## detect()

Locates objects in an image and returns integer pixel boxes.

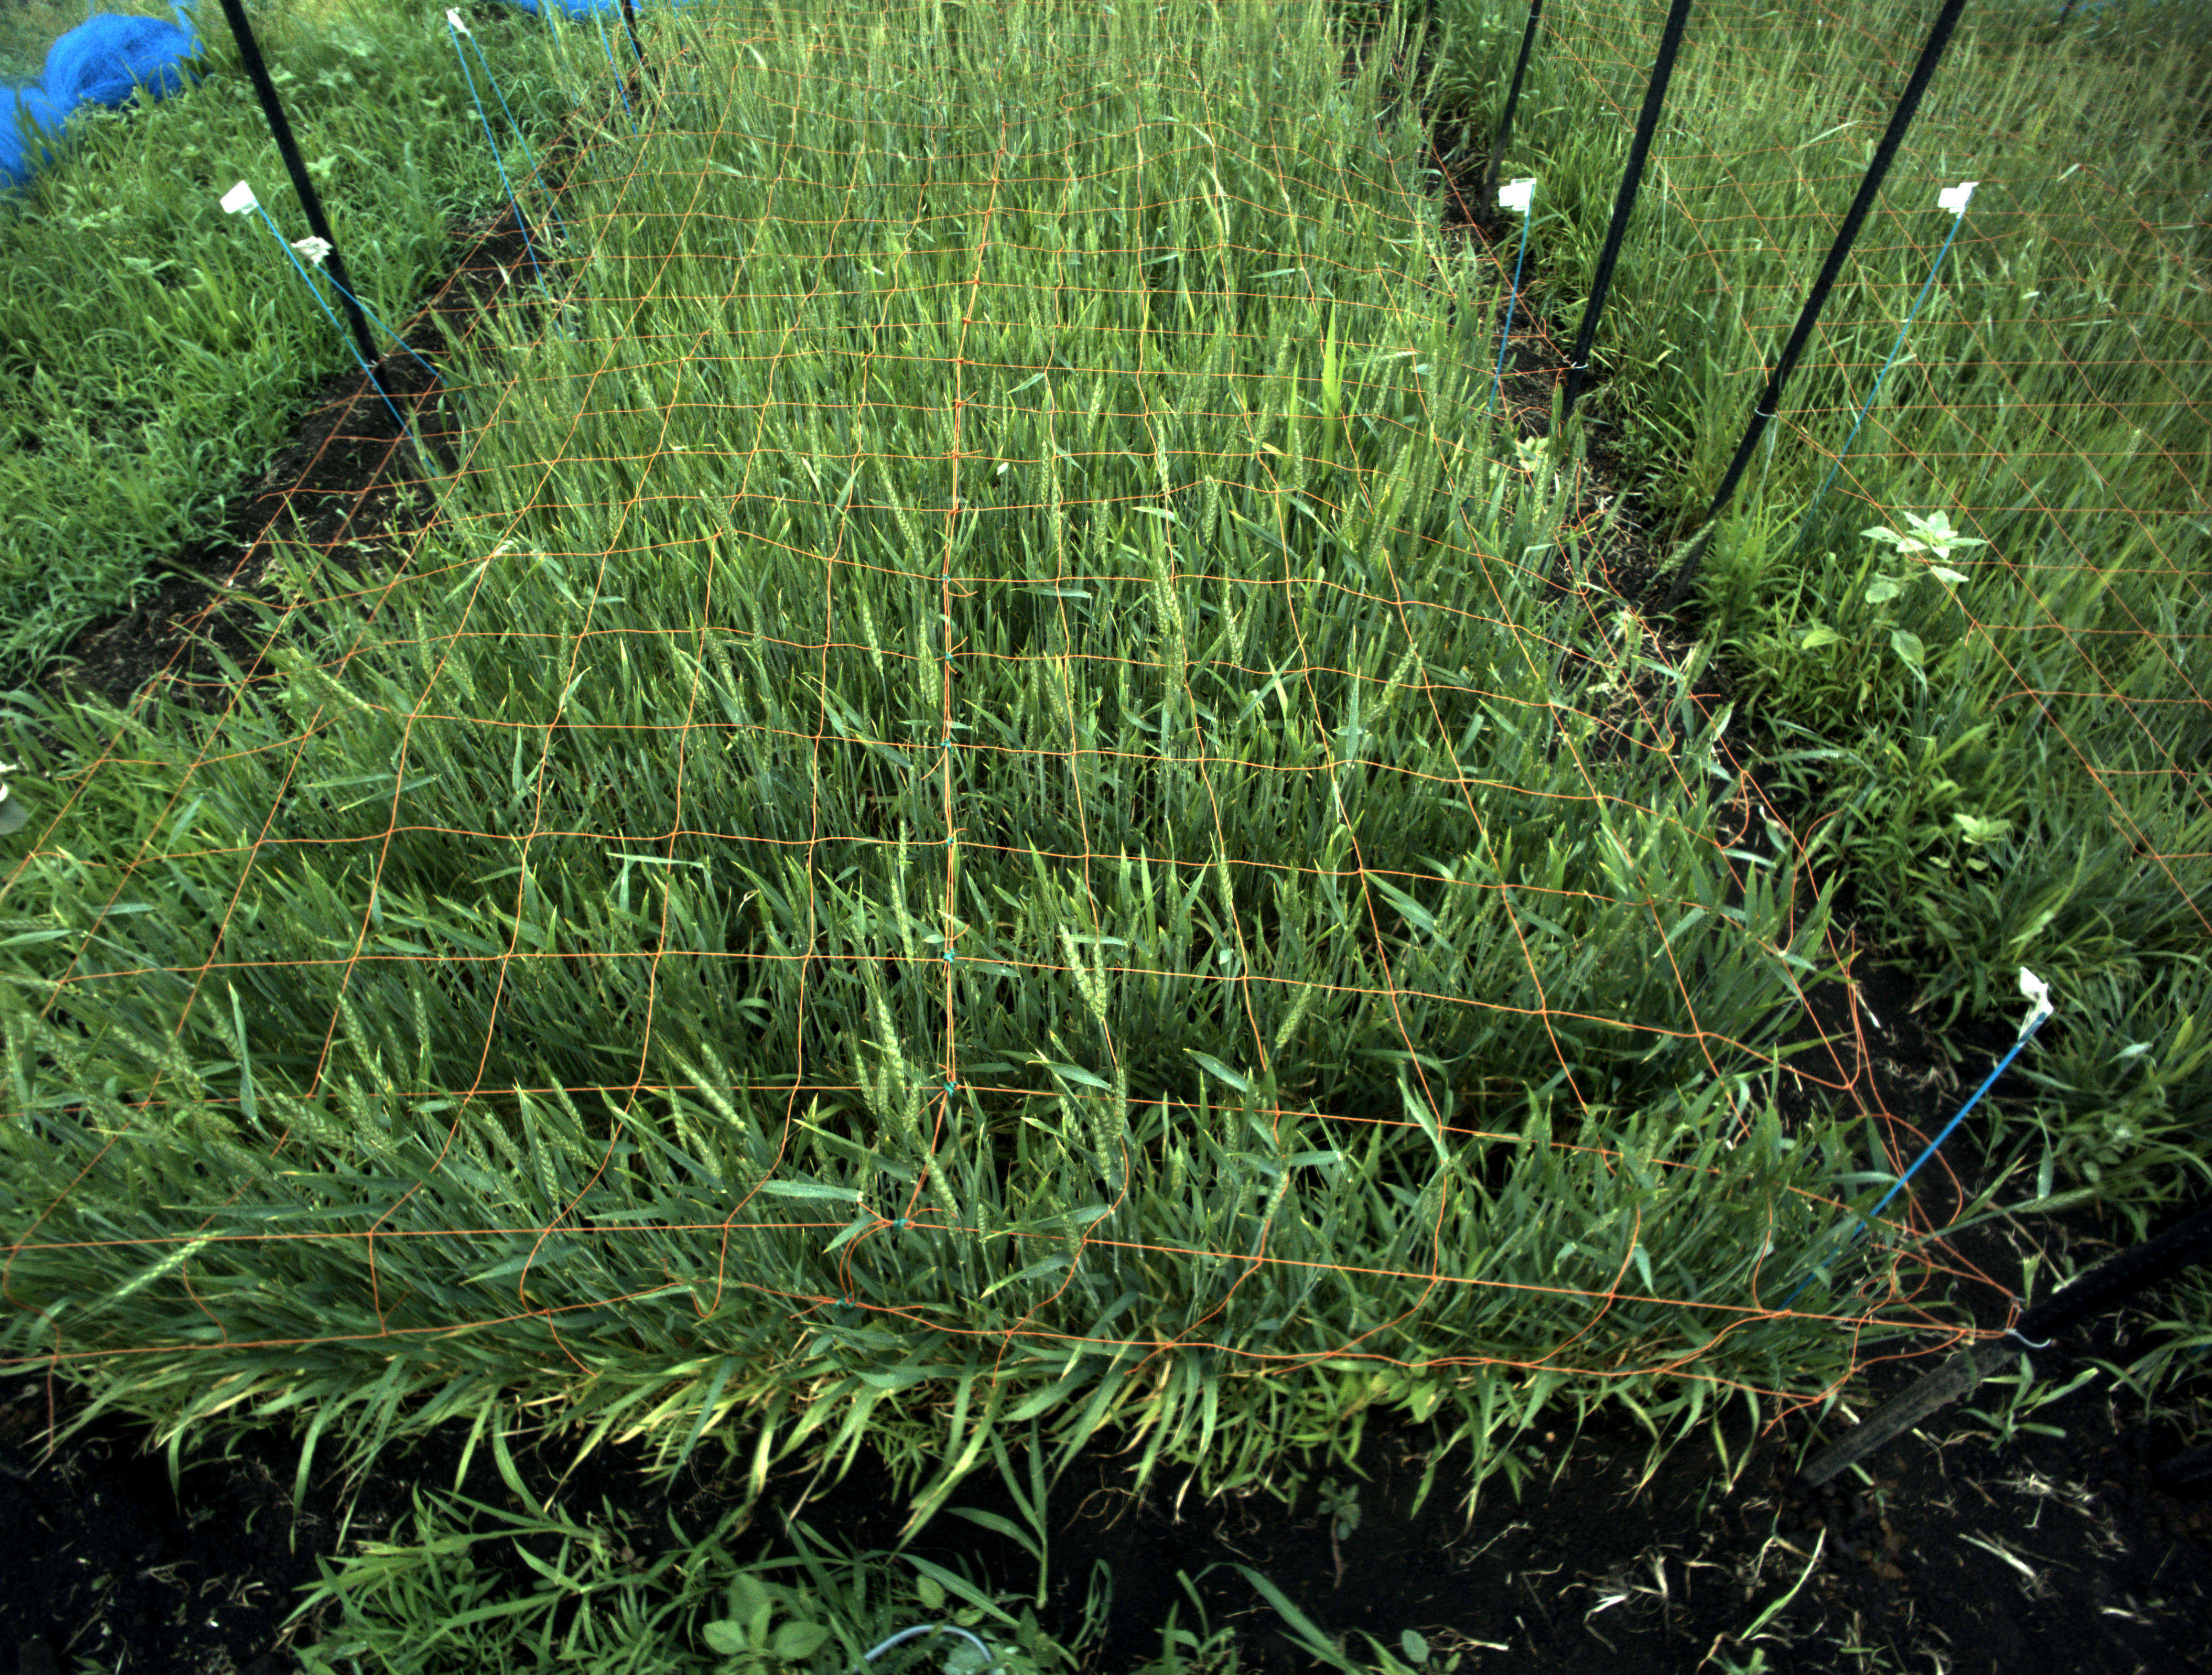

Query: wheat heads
[965,1,971,33]
[677,555,689,592]
[485,1111,518,1164]
[111,1023,204,1087]
[1654,874,1680,909]
[1324,61,1332,79]
[1015,694,1024,730]
[414,879,429,918]
[679,1060,748,1134]
[913,520,926,574]
[1476,873,1503,921]
[1378,18,1387,50]
[1040,874,1052,911]
[1679,68,1692,106]
[1435,891,1450,932]
[610,914,639,952]
[1471,327,1488,369]
[789,535,805,570]
[1223,1110,1240,1162]
[1260,1094,1270,1129]
[1088,228,1095,255]
[440,642,477,694]
[1111,53,1123,94]
[1261,345,1272,379]
[204,715,225,760]
[345,1071,381,1158]
[499,457,524,505]
[408,405,426,459]
[1552,1194,1562,1223]
[918,16,927,52]
[544,47,562,82]
[1173,125,1182,167]
[855,169,868,219]
[884,351,893,388]
[509,582,524,613]
[1422,753,1438,782]
[1143,181,1150,211]
[1117,914,1125,939]
[900,188,910,214]
[337,988,371,1067]
[742,484,749,504]
[680,532,689,557]
[660,20,669,57]
[861,695,872,734]
[1035,903,1048,944]
[1173,934,1183,966]
[1527,717,1542,748]
[551,386,572,430]
[1157,555,1182,628]
[1449,574,1458,596]
[659,901,674,936]
[1312,223,1327,264]
[939,25,948,58]
[524,370,546,417]
[1341,906,1363,939]
[1341,886,1348,911]
[1109,1067,1127,1144]
[1367,513,1390,567]
[1031,1144,1045,1169]
[1293,428,1303,495]
[1185,25,1195,65]
[651,679,661,707]
[1099,596,1108,632]
[925,887,936,923]
[1170,893,1179,936]
[274,1089,356,1150]
[658,67,666,91]
[520,973,540,1002]
[1266,291,1277,340]
[1299,10,1309,38]
[1383,443,1408,494]
[570,440,580,468]
[1825,1149,1853,1176]
[667,592,689,628]
[762,267,769,294]
[1250,401,1268,460]
[689,1132,723,1179]
[822,1165,832,1208]
[1097,1103,1117,1145]
[1223,205,1232,239]
[967,468,975,503]
[840,447,852,473]
[227,922,252,953]
[1228,313,1236,332]
[1056,1093,1087,1150]
[668,1084,689,1150]
[956,1141,969,1174]
[590,523,602,557]
[483,569,507,602]
[686,15,709,54]
[1313,3,1325,39]
[910,566,919,598]
[1393,2,1400,41]
[779,35,790,68]
[928,659,940,701]
[484,894,499,931]
[727,373,736,400]
[1218,850,1234,915]
[1445,1150,1465,1171]
[1483,365,1493,399]
[1014,789,1020,818]
[1134,299,1142,325]
[645,1140,668,1171]
[920,336,930,382]
[713,753,727,782]
[1012,1198,1021,1221]
[654,33,664,56]
[1140,360,1150,395]
[913,735,922,783]
[1199,1165,1212,1188]
[1436,365,1455,427]
[704,151,715,184]
[820,160,837,196]
[1778,47,1791,78]
[668,30,678,63]
[254,768,278,793]
[560,44,585,93]
[1339,490,1356,539]
[1249,320,1265,353]
[560,557,573,591]
[1427,614,1441,649]
[270,1108,353,1152]
[1352,498,1360,551]
[535,1135,561,1204]
[931,1,941,33]
[793,16,810,72]
[1125,956,1133,985]
[874,911,886,946]
[2111,207,2129,236]
[469,544,510,583]
[850,922,867,956]
[1474,442,1485,518]
[709,482,739,543]
[1455,916,1466,942]
[968,67,983,105]
[667,638,707,697]
[683,272,690,293]
[1180,152,1189,186]
[2077,67,2097,106]
[386,702,418,744]
[755,330,764,362]
[1041,300,1055,338]
[807,580,814,608]
[1399,18,1407,54]
[1630,95,1639,113]
[523,464,531,492]
[1149,942,1161,963]
[557,618,572,683]
[288,660,349,722]
[777,543,795,584]
[1691,76,1707,108]
[623,572,631,604]
[1424,62,1439,98]
[1299,41,1308,89]
[1450,874,1466,912]
[544,310,558,378]
[582,549,590,566]
[758,60,770,84]
[673,482,681,503]
[433,493,479,557]
[1292,38,1298,64]
[397,792,419,820]
[1263,1169,1291,1221]
[2092,692,2109,720]
[616,56,630,88]
[693,720,706,753]
[776,67,783,88]
[1203,473,1213,532]
[2,1021,18,1103]
[1283,113,1296,168]
[888,194,901,223]
[785,74,790,90]
[1116,474,1125,505]
[1288,610,1294,630]
[459,650,473,682]
[1404,515,1421,570]
[832,1198,846,1214]
[1752,1209,1768,1247]
[840,709,851,749]
[567,464,580,490]
[1410,602,1419,633]
[921,1146,958,1213]
[1897,293,1908,317]
[623,250,630,282]
[1431,1185,1444,1215]
[84,690,194,782]
[1171,1160,1183,1193]
[1824,39,1836,67]
[603,151,616,184]
[1020,347,1029,378]
[444,695,480,740]
[1660,896,1682,933]
[1638,1124,1658,1174]
[1180,312,1186,340]
[943,279,948,304]
[314,666,377,715]
[1007,336,1020,370]
[1412,655,1424,693]
[1597,486,1628,539]
[1154,578,1169,638]
[830,884,840,924]
[867,34,878,79]
[809,1131,829,1165]
[1794,816,1834,870]
[720,55,731,86]
[1012,9,1023,52]
[1026,935,1032,963]
[1239,1176,1254,1209]
[1024,62,1035,112]
[890,581,901,608]
[885,50,895,85]
[637,34,654,55]
[492,455,513,519]
[1126,345,1135,374]
[1372,355,1393,423]
[2122,428,2143,457]
[47,1181,90,1212]
[530,409,547,445]
[726,1227,749,1243]
[1086,376,1102,438]
[952,302,960,339]
[1197,354,1213,416]
[576,603,587,628]
[705,71,713,111]
[650,77,673,117]
[1032,722,1040,750]
[749,608,763,655]
[1102,328,1111,369]
[632,1110,649,1156]
[596,244,608,278]
[1707,701,1734,737]
[1392,459,1416,525]
[1047,85,1056,129]
[1420,710,1433,740]
[1388,423,1394,444]
[883,1107,907,1145]
[748,1157,773,1179]
[398,653,415,702]
[1092,501,1107,567]
[1632,918,1649,950]
[636,1243,655,1260]
[1381,642,1418,701]
[664,496,671,519]
[1788,39,1804,73]
[1576,543,1598,584]
[1273,979,1312,1049]
[1153,181,1166,210]
[570,759,581,792]
[782,702,790,748]
[796,492,804,520]
[1125,132,1131,167]
[963,271,973,308]
[1062,1212,1083,1258]
[1127,773,1133,798]
[814,342,827,365]
[555,505,564,523]
[1425,103,1441,131]
[972,31,980,64]
[1271,332,1291,388]
[1253,500,1269,558]
[827,304,836,373]
[967,572,974,603]
[933,449,941,480]
[1303,323,1314,363]
[1440,914,1462,936]
[1293,118,1300,152]
[682,719,696,750]
[1401,43,1412,75]
[747,340,757,368]
[1414,481,1431,518]
[1156,418,1170,494]
[1342,685,1355,725]
[763,724,773,772]
[1962,32,1975,67]
[1094,24,1099,55]
[938,892,951,936]
[928,480,933,519]
[551,1073,584,1127]
[1704,1215,1723,1234]
[1092,1112,1111,1183]
[1001,387,1008,432]
[853,1048,878,1113]
[556,925,576,954]
[820,117,827,137]
[1224,257,1230,285]
[938,406,963,471]
[1060,50,1066,78]
[1176,375,1193,432]
[914,65,919,96]
[1093,496,1110,554]
[1698,83,1709,118]
[1231,604,1252,665]
[861,1169,870,1207]
[601,46,613,87]
[657,338,683,363]
[746,567,755,594]
[79,899,115,933]
[1298,398,1310,441]
[1557,905,1572,928]
[1477,588,1490,610]
[700,1040,735,1106]
[1267,756,1275,787]
[971,682,985,730]
[927,76,937,111]
[876,461,916,546]
[1267,386,1282,435]
[622,727,641,761]
[1372,476,1383,510]
[976,1200,988,1239]
[82,1190,139,1216]
[1045,0,1051,47]
[996,425,1003,450]
[1336,1172,1347,1192]
[1292,275,1300,298]
[584,734,603,770]
[1416,264,1423,291]
[1457,450,1480,505]
[1194,461,1203,494]
[900,270,905,289]
[858,459,866,497]
[1092,943,1108,1022]
[361,1056,389,1091]
[1669,77,1681,119]
[1503,543,1521,584]
[695,261,711,301]
[1068,724,1084,757]
[1419,455,1432,505]
[1119,289,1128,317]
[902,1079,921,1133]
[1926,87,1943,114]
[1433,736,1443,752]
[1774,1149,1794,1181]
[2084,299,2099,331]
[1096,291,1102,316]
[268,912,291,947]
[901,75,909,120]
[1031,328,1046,371]
[992,330,998,357]
[470,292,509,350]
[690,279,699,300]
[796,300,825,341]
[1704,108,1720,134]
[414,609,436,676]
[681,295,695,316]
[885,69,888,89]
[1369,317,1394,383]
[1588,1211,1616,1235]
[579,40,602,74]
[1054,23,1063,59]
[1301,905,1309,942]
[1425,545,1446,587]
[834,228,841,257]
[105,1097,183,1144]
[1320,238,1327,269]
[1164,883,1172,918]
[1365,701,1389,724]
[684,869,694,912]
[984,75,994,126]
[1131,24,1141,57]
[1065,227,1073,257]
[19,1010,76,1075]
[1091,153,1097,174]
[762,84,775,120]
[986,368,997,425]
[802,117,813,156]
[1337,50,1345,68]
[639,70,655,105]
[293,919,318,943]
[1363,984,1375,1006]
[1700,898,1720,936]
[304,740,321,772]
[1245,574,1260,613]
[1336,16,1345,52]
[804,1277,819,1289]
[583,898,603,938]
[411,988,431,1048]
[591,485,607,546]
[678,57,689,92]
[1054,532,1073,581]
[1371,47,1377,85]
[825,329,838,344]
[968,940,976,974]
[598,130,627,154]
[865,743,878,766]
[601,316,613,354]
[426,723,444,757]
[1245,244,1251,267]
[1725,1150,1753,1188]
[674,453,688,478]
[1102,908,1113,935]
[993,189,1004,208]
[1221,37,1229,69]
[664,559,674,588]
[1089,18,1095,57]
[1609,641,1631,691]
[1205,53,1223,95]
[1178,183,1186,217]
[548,423,564,456]
[631,370,664,423]
[932,592,941,628]
[776,420,808,482]
[747,463,757,482]
[1420,1190,1434,1214]
[944,344,950,374]
[956,30,964,62]
[1526,933,1546,968]
[487,455,496,478]
[1526,1171,1545,1203]
[1418,231,1423,268]
[1206,254,1215,277]
[917,426,925,458]
[930,544,938,576]
[874,149,886,180]
[1457,939,1469,965]
[1307,2,1315,26]
[1001,734,1022,768]
[870,1177,882,1213]
[1530,451,1550,526]
[899,465,910,498]
[607,482,618,536]
[1077,329,1086,368]
[711,294,722,351]
[498,737,514,772]
[1266,50,1274,91]
[0,913,54,933]
[851,76,856,97]
[828,592,836,625]
[1189,123,1212,147]
[807,0,813,21]
[1205,486,1219,545]
[1704,1172,1727,1210]
[1112,564,1125,602]
[766,326,777,361]
[1250,109,1260,137]
[524,424,540,456]
[162,1028,203,1098]
[1367,240,1377,271]
[762,462,779,499]
[384,1022,414,1093]
[1181,3,1188,37]
[806,77,813,102]
[940,67,951,110]
[1189,728,1200,758]
[1796,165,1802,199]
[555,20,569,53]
[202,995,243,1062]
[719,660,745,709]
[841,378,847,407]
[731,88,752,118]
[597,411,610,447]
[1221,596,1243,664]
[1145,52,1150,74]
[833,1167,845,1188]
[1681,640,1710,703]
[877,995,908,1093]
[707,408,714,433]
[1519,890,1533,927]
[718,196,734,228]
[542,1124,601,1168]
[1501,1229,1523,1257]
[191,1183,229,1207]
[1397,741,1413,768]
[1928,283,1940,319]
[1147,11,1154,43]
[656,729,666,754]
[1166,377,1176,406]
[842,229,852,254]
[737,1167,757,1206]
[1064,656,1075,696]
[496,940,512,976]
[1276,1226,1287,1250]
[1383,14,1392,64]
[1466,580,1477,605]
[983,1136,993,1172]
[1748,913,1777,942]
[0,976,80,995]
[1734,228,1746,292]
[839,16,851,57]
[1026,1234,1047,1259]
[320,909,346,940]
[1044,672,1066,726]
[1107,475,1115,503]
[1565,588,1577,630]
[684,33,712,72]
[1637,807,1671,861]
[1182,80,1188,120]
[663,56,672,81]
[1080,772,1088,802]
[1301,454,1314,488]
[1018,67,1026,99]
[795,755,806,782]
[1223,738,1234,778]
[2123,212,2142,240]
[1763,920,1782,948]
[1519,1112,1536,1157]
[751,1226,769,1251]
[601,888,629,925]
[774,16,790,51]
[1090,291,1099,338]
[1532,519,1556,573]
[778,557,790,590]
[708,1275,744,1289]
[1578,1104,1596,1144]
[510,1142,534,1171]
[1062,2,1071,49]
[805,356,819,394]
[1058,921,1095,1007]
[526,507,540,523]
[142,894,179,926]
[572,124,585,152]
[1282,868,1298,923]
[1050,471,1061,532]
[970,363,984,399]
[839,589,848,621]
[1028,469,1034,493]
[1132,1134,1142,1176]
[1363,67,1371,111]
[625,542,639,574]
[1603,910,1635,952]
[864,115,872,144]
[1221,415,1238,467]
[797,185,809,226]
[1336,151,1340,172]
[1566,429,1580,481]
[1012,292,1019,312]
[417,908,444,955]
[1069,1,1076,36]
[792,917,817,954]
[116,1228,226,1300]
[699,488,721,520]
[1411,43,1419,81]
[1526,680,1539,710]
[1628,1217,1640,1248]
[1039,438,1051,505]
[1725,760,1753,800]
[1423,132,1434,167]
[1538,882,1551,916]
[890,876,903,928]
[1247,205,1257,230]
[1236,736,1243,770]
[565,73,575,105]
[700,623,732,666]
[1829,65,1840,95]
[1025,272,1045,334]
[914,915,926,959]
[501,1170,520,1199]
[208,1137,272,1182]
[1402,291,1412,349]
[1338,128,1343,158]
[1204,18,1217,86]
[992,909,998,934]
[1378,796,1392,821]
[2017,1186,2095,1214]
[1226,710,1238,728]
[1045,1193,1063,1216]
[815,1,825,34]
[650,168,669,203]
[1223,341,1232,375]
[85,1090,111,1133]
[1758,74,1774,111]
[759,89,765,118]
[934,188,945,217]
[1073,875,1082,907]
[1014,915,1023,946]
[990,7,1000,58]
[1919,87,1928,109]
[1261,757,1269,782]
[918,614,928,692]
[809,412,822,480]
[579,518,587,549]
[356,617,397,673]
[423,787,442,814]
[1618,818,1631,842]
[1404,58,1411,84]
[803,707,809,734]
[1165,674,1175,715]
[1028,656,1040,696]
[872,1063,891,1114]
[973,1,991,46]
[559,1189,588,1213]
[1367,508,1382,556]
[811,763,824,788]
[560,358,573,417]
[1192,394,1202,451]
[640,76,650,111]
[1173,0,1182,28]
[1401,809,1410,837]
[306,940,340,973]
[599,953,627,982]
[1000,268,1011,296]
[1126,911,1138,948]
[438,706,468,753]
[1223,1169,1233,1200]
[780,869,801,920]
[2104,275,2119,299]
[681,671,708,711]
[495,293,519,345]
[861,603,884,673]
[1214,337,1222,385]
[1173,630,1184,690]
[900,911,915,966]
[347,1105,397,1150]
[753,438,766,478]
[943,1204,955,1239]
[1312,876,1322,918]
[182,1102,237,1130]
[984,573,991,601]
[854,70,862,107]
[674,1227,693,1253]
[741,741,758,773]
[1189,146,1201,182]
[857,272,871,330]
[1282,4,1290,42]
[1195,319,1204,357]
[1034,1,1040,20]
[1086,46,1091,76]
[1400,101,1406,123]
[824,512,838,554]
[877,44,884,89]
[1306,58,1318,91]
[716,576,725,613]
[1659,519,1716,576]
[1423,454,1441,518]
[456,1115,493,1170]
[1049,711,1065,750]
[587,72,606,113]
[1425,348,1439,420]
[898,819,908,866]
[659,134,670,162]
[754,73,761,105]
[1379,52,1393,89]
[1023,711,1034,751]
[891,1149,931,1176]
[641,586,652,614]
[1339,1179,1351,1206]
